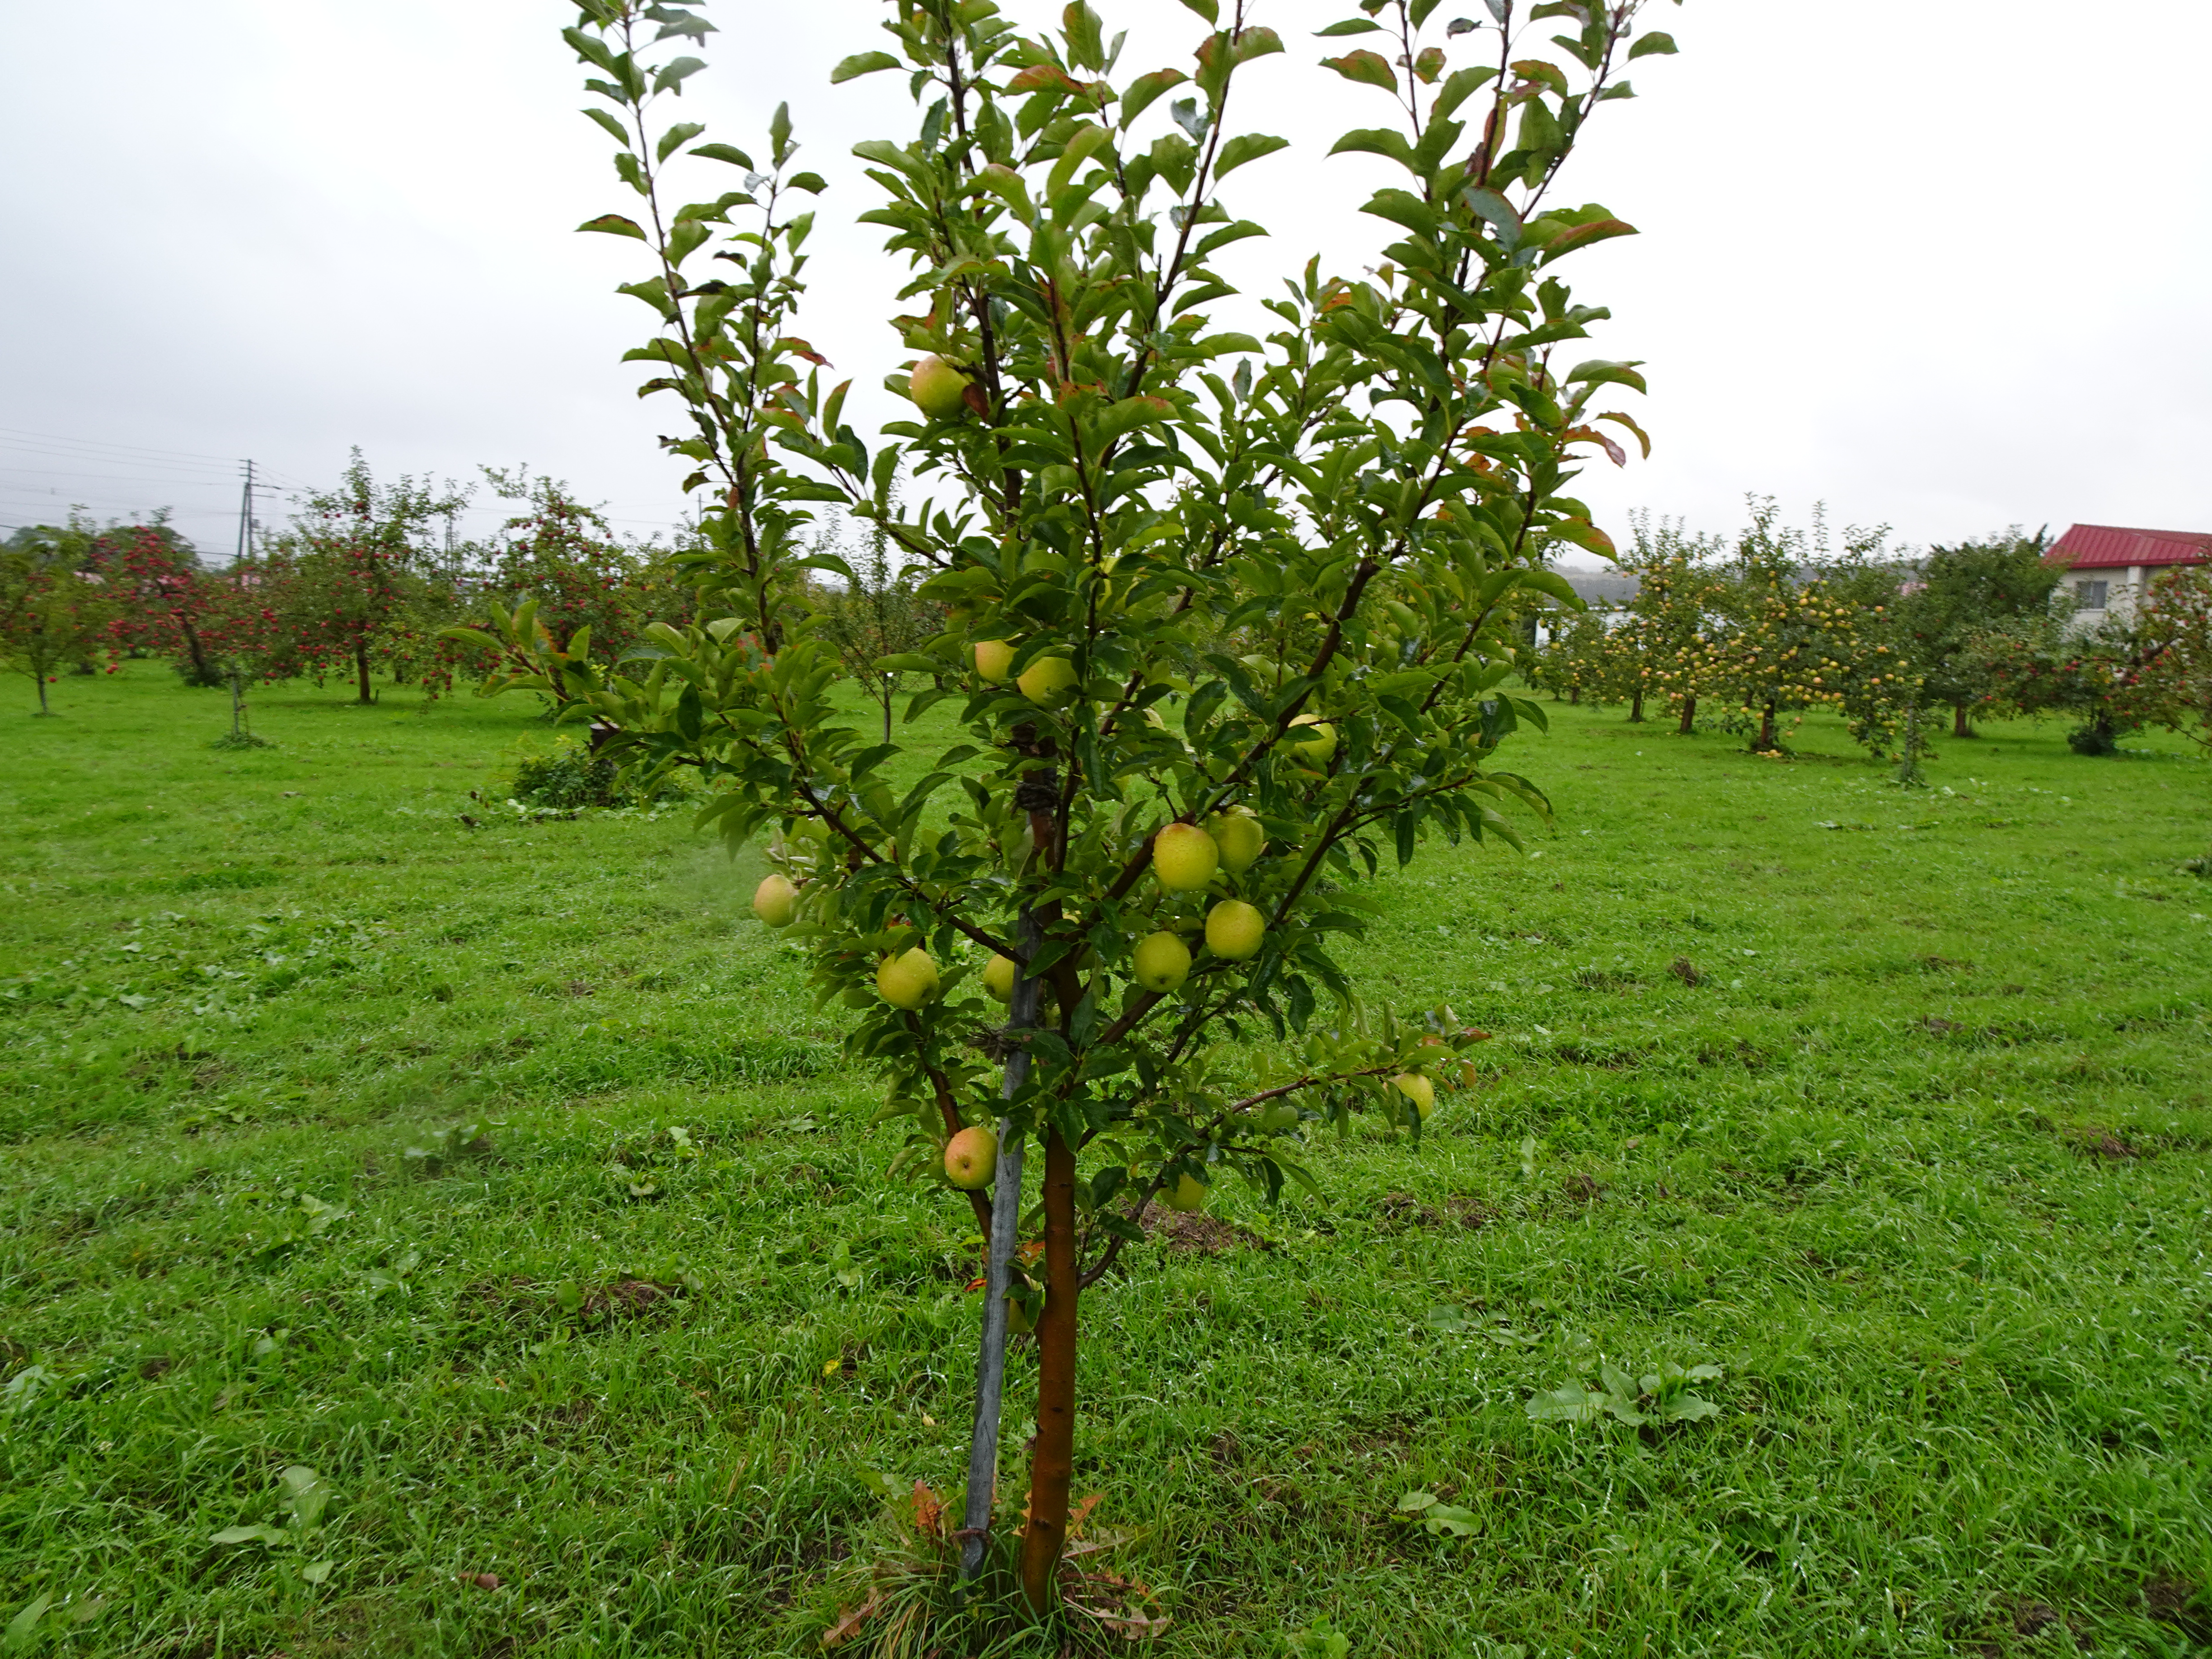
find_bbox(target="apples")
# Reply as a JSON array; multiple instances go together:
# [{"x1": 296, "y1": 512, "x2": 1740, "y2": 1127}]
[
  {"x1": 907, "y1": 348, "x2": 982, "y2": 422},
  {"x1": 1150, "y1": 820, "x2": 1222, "y2": 895},
  {"x1": 1204, "y1": 893, "x2": 1272, "y2": 965},
  {"x1": 1303, "y1": 611, "x2": 1323, "y2": 633},
  {"x1": 1110, "y1": 707, "x2": 1167, "y2": 763},
  {"x1": 749, "y1": 870, "x2": 804, "y2": 932},
  {"x1": 1375, "y1": 1068, "x2": 1439, "y2": 1130},
  {"x1": 940, "y1": 1122, "x2": 1007, "y2": 1192},
  {"x1": 1464, "y1": 728, "x2": 1496, "y2": 755},
  {"x1": 979, "y1": 942, "x2": 1026, "y2": 1008},
  {"x1": 1130, "y1": 928, "x2": 1194, "y2": 996},
  {"x1": 1154, "y1": 1152, "x2": 1211, "y2": 1216},
  {"x1": 997, "y1": 1268, "x2": 1047, "y2": 1338},
  {"x1": 875, "y1": 939, "x2": 945, "y2": 1014},
  {"x1": 1205, "y1": 801, "x2": 1270, "y2": 875},
  {"x1": 1053, "y1": 909, "x2": 1103, "y2": 971},
  {"x1": 973, "y1": 624, "x2": 1036, "y2": 692},
  {"x1": 1282, "y1": 707, "x2": 1341, "y2": 773},
  {"x1": 1079, "y1": 756, "x2": 1131, "y2": 803},
  {"x1": 1011, "y1": 645, "x2": 1088, "y2": 720},
  {"x1": 1075, "y1": 554, "x2": 1141, "y2": 615}
]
